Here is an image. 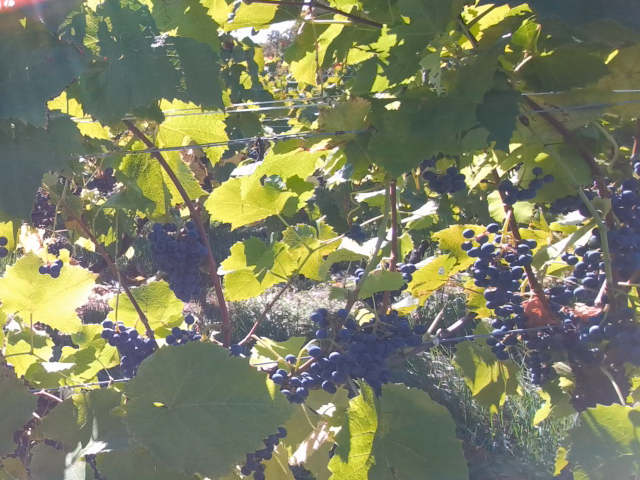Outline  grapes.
<instances>
[{"instance_id":"3","label":"grapes","mask_w":640,"mask_h":480,"mask_svg":"<svg viewBox=\"0 0 640 480\" xmlns=\"http://www.w3.org/2000/svg\"><path fill=\"white\" fill-rule=\"evenodd\" d=\"M185 229L187 236L176 241L172 234L166 233L177 230L175 222L155 223L148 240L155 243L149 246V253L156 268L171 279L169 289L179 301L189 302L191 297L199 298L203 293L201 271L195 264L209 255V248L198 241L200 234L193 221H187Z\"/></svg>"},{"instance_id":"1","label":"grapes","mask_w":640,"mask_h":480,"mask_svg":"<svg viewBox=\"0 0 640 480\" xmlns=\"http://www.w3.org/2000/svg\"><path fill=\"white\" fill-rule=\"evenodd\" d=\"M345 328L339 329L337 336L350 344L346 355L329 352L325 358L322 348L312 345L309 348V355L314 361L309 366L311 373L302 372L300 377L292 376L288 386L283 383L289 378V373L284 368H278L274 372L272 382L282 384L280 391L290 403L302 404L308 397L307 388H315L318 384L325 392L335 394L337 387L333 382L341 384L347 375L367 378L369 386L373 390H379L381 382L389 377L386 354L407 344L411 347L419 346V335L425 333L423 324H415L412 333L409 321L399 317L396 310H390L388 314L363 322L361 332L359 323L355 320H347Z\"/></svg>"},{"instance_id":"13","label":"grapes","mask_w":640,"mask_h":480,"mask_svg":"<svg viewBox=\"0 0 640 480\" xmlns=\"http://www.w3.org/2000/svg\"><path fill=\"white\" fill-rule=\"evenodd\" d=\"M202 338V333L195 329H182L181 327H173L171 335L166 337V343L169 346H185L189 341H197Z\"/></svg>"},{"instance_id":"4","label":"grapes","mask_w":640,"mask_h":480,"mask_svg":"<svg viewBox=\"0 0 640 480\" xmlns=\"http://www.w3.org/2000/svg\"><path fill=\"white\" fill-rule=\"evenodd\" d=\"M600 239L599 230L594 228L587 245H577L574 253H565L562 256L564 262L569 265H575L572 270V276L565 279V284L568 288L563 285H554L545 290L553 312L563 325H568L575 321V313L573 311L563 312L562 310L569 298L573 296L586 297L585 303L588 306H592L595 303L596 296L602 289L604 272H597L604 270L603 260L599 261L600 252L591 250L586 254L590 249H599L601 247Z\"/></svg>"},{"instance_id":"8","label":"grapes","mask_w":640,"mask_h":480,"mask_svg":"<svg viewBox=\"0 0 640 480\" xmlns=\"http://www.w3.org/2000/svg\"><path fill=\"white\" fill-rule=\"evenodd\" d=\"M522 340L527 350H536L530 354L529 372L531 373V382L534 385H539L552 375V368L550 366L542 367L540 362L551 363L553 356L541 352L547 348V342L543 338H535L530 333H523Z\"/></svg>"},{"instance_id":"17","label":"grapes","mask_w":640,"mask_h":480,"mask_svg":"<svg viewBox=\"0 0 640 480\" xmlns=\"http://www.w3.org/2000/svg\"><path fill=\"white\" fill-rule=\"evenodd\" d=\"M63 267V261L61 259H56L52 266L48 264H42L39 267V272L41 274H50L52 278H58L60 276V269Z\"/></svg>"},{"instance_id":"9","label":"grapes","mask_w":640,"mask_h":480,"mask_svg":"<svg viewBox=\"0 0 640 480\" xmlns=\"http://www.w3.org/2000/svg\"><path fill=\"white\" fill-rule=\"evenodd\" d=\"M279 434L269 435V439H263V443H265L266 448L261 451H256L255 453H247L246 454V466L242 467L241 472L245 476H249L252 471L254 473V480H265V469L266 464H262V461H270L272 460V452L274 450V445H278L279 439L286 438L287 430L285 427H278Z\"/></svg>"},{"instance_id":"2","label":"grapes","mask_w":640,"mask_h":480,"mask_svg":"<svg viewBox=\"0 0 640 480\" xmlns=\"http://www.w3.org/2000/svg\"><path fill=\"white\" fill-rule=\"evenodd\" d=\"M489 236L480 234L477 242L482 246L472 247L470 240L461 243V248L468 251L470 258L479 257L480 259L474 263L473 276L476 278L474 286L476 288L491 287L484 291V299L486 308L493 310L497 316L509 317L511 314H518L514 318L506 321L502 318H495L491 322L493 329L499 330L504 328H526L528 316L523 312L522 297L515 294L520 290V280L523 275L522 265H530L533 262V251L537 247L535 239H527L517 245V251L503 252L502 258L513 268L508 271L505 265H489L494 262L501 250H496L494 243H488Z\"/></svg>"},{"instance_id":"19","label":"grapes","mask_w":640,"mask_h":480,"mask_svg":"<svg viewBox=\"0 0 640 480\" xmlns=\"http://www.w3.org/2000/svg\"><path fill=\"white\" fill-rule=\"evenodd\" d=\"M408 288V284H402L397 290H390V303L394 302V297H398L402 294V291Z\"/></svg>"},{"instance_id":"6","label":"grapes","mask_w":640,"mask_h":480,"mask_svg":"<svg viewBox=\"0 0 640 480\" xmlns=\"http://www.w3.org/2000/svg\"><path fill=\"white\" fill-rule=\"evenodd\" d=\"M102 338L107 340L111 347H116L120 352V368L124 370V376L132 378L135 369L141 360L146 359L155 352L157 341L154 338H143L133 328H126L123 321L112 323L110 320L103 322Z\"/></svg>"},{"instance_id":"11","label":"grapes","mask_w":640,"mask_h":480,"mask_svg":"<svg viewBox=\"0 0 640 480\" xmlns=\"http://www.w3.org/2000/svg\"><path fill=\"white\" fill-rule=\"evenodd\" d=\"M555 182V176L553 174H545L541 180H531L529 182V188L519 190L511 180H503L499 183V189L504 190L509 195L503 197V203L505 205L515 204L518 201H524L525 199H534L536 197V191L541 189L544 184H553Z\"/></svg>"},{"instance_id":"14","label":"grapes","mask_w":640,"mask_h":480,"mask_svg":"<svg viewBox=\"0 0 640 480\" xmlns=\"http://www.w3.org/2000/svg\"><path fill=\"white\" fill-rule=\"evenodd\" d=\"M518 338L516 336L494 335L487 340V345L492 347V352L497 359L506 360L508 358V346H516Z\"/></svg>"},{"instance_id":"16","label":"grapes","mask_w":640,"mask_h":480,"mask_svg":"<svg viewBox=\"0 0 640 480\" xmlns=\"http://www.w3.org/2000/svg\"><path fill=\"white\" fill-rule=\"evenodd\" d=\"M328 311L326 309H318L311 314V321L318 324V330L315 332L317 339H323L326 337L327 326L329 320L327 319Z\"/></svg>"},{"instance_id":"10","label":"grapes","mask_w":640,"mask_h":480,"mask_svg":"<svg viewBox=\"0 0 640 480\" xmlns=\"http://www.w3.org/2000/svg\"><path fill=\"white\" fill-rule=\"evenodd\" d=\"M424 179L428 182V187L436 193L454 194L456 191H463L466 187L465 174L459 172L457 167H448L446 174L435 177L431 171L424 173Z\"/></svg>"},{"instance_id":"15","label":"grapes","mask_w":640,"mask_h":480,"mask_svg":"<svg viewBox=\"0 0 640 480\" xmlns=\"http://www.w3.org/2000/svg\"><path fill=\"white\" fill-rule=\"evenodd\" d=\"M115 187V178L113 177V169L106 167L104 169V177L98 179H90L87 182V188L94 190L98 188L100 192H110Z\"/></svg>"},{"instance_id":"18","label":"grapes","mask_w":640,"mask_h":480,"mask_svg":"<svg viewBox=\"0 0 640 480\" xmlns=\"http://www.w3.org/2000/svg\"><path fill=\"white\" fill-rule=\"evenodd\" d=\"M397 271L399 273H402L403 279L405 281L411 282L413 280V277L410 273H413L415 271V266L413 264L399 263Z\"/></svg>"},{"instance_id":"5","label":"grapes","mask_w":640,"mask_h":480,"mask_svg":"<svg viewBox=\"0 0 640 480\" xmlns=\"http://www.w3.org/2000/svg\"><path fill=\"white\" fill-rule=\"evenodd\" d=\"M618 195L613 186H609V198L616 218L627 223V227L609 230L608 252L611 267L620 272L622 280H628L640 269V182L627 179Z\"/></svg>"},{"instance_id":"7","label":"grapes","mask_w":640,"mask_h":480,"mask_svg":"<svg viewBox=\"0 0 640 480\" xmlns=\"http://www.w3.org/2000/svg\"><path fill=\"white\" fill-rule=\"evenodd\" d=\"M603 315L596 313L589 319L590 325L580 329V339L583 342H601L611 339L618 342L621 350V360L630 362L633 366H640V326L630 325L624 329L621 323H608L603 327L600 323Z\"/></svg>"},{"instance_id":"20","label":"grapes","mask_w":640,"mask_h":480,"mask_svg":"<svg viewBox=\"0 0 640 480\" xmlns=\"http://www.w3.org/2000/svg\"><path fill=\"white\" fill-rule=\"evenodd\" d=\"M363 270H364L363 268H358V269L355 271V277H356L355 284H357V283H358V281H359V279H360V276H361V274H362Z\"/></svg>"},{"instance_id":"12","label":"grapes","mask_w":640,"mask_h":480,"mask_svg":"<svg viewBox=\"0 0 640 480\" xmlns=\"http://www.w3.org/2000/svg\"><path fill=\"white\" fill-rule=\"evenodd\" d=\"M578 212L583 217L592 218L594 215L592 210L582 202L579 195H568L564 199L558 198L554 200L550 206V213L552 215H568L570 212Z\"/></svg>"}]
</instances>
